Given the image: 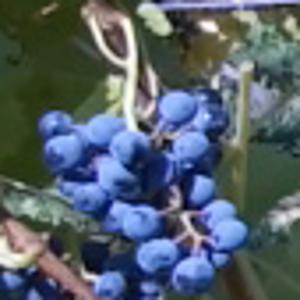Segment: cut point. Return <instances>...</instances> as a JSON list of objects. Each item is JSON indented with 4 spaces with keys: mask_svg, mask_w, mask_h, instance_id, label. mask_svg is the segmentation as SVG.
I'll use <instances>...</instances> for the list:
<instances>
[{
    "mask_svg": "<svg viewBox=\"0 0 300 300\" xmlns=\"http://www.w3.org/2000/svg\"><path fill=\"white\" fill-rule=\"evenodd\" d=\"M91 13L92 7L90 5H85L81 11V18L93 33L104 58L110 64H115L120 68L127 70L125 94L123 97L124 109L122 110V115L127 118L128 124L131 128H136L138 126V121L133 105V95L135 94V86L137 85V63L135 45L136 35L134 34L133 27L127 17H122L120 19V27L123 30L126 39L127 59H125L113 53L101 27Z\"/></svg>",
    "mask_w": 300,
    "mask_h": 300,
    "instance_id": "1",
    "label": "cut point"
}]
</instances>
